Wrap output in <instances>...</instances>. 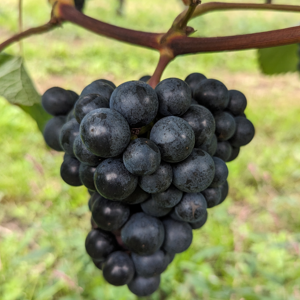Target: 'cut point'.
<instances>
[{
  "mask_svg": "<svg viewBox=\"0 0 300 300\" xmlns=\"http://www.w3.org/2000/svg\"><path fill=\"white\" fill-rule=\"evenodd\" d=\"M159 60L156 65V68L149 80V85L153 89L161 81L162 75L165 72L167 66L173 62L177 57L178 53L168 48H159Z\"/></svg>",
  "mask_w": 300,
  "mask_h": 300,
  "instance_id": "1",
  "label": "cut point"
}]
</instances>
